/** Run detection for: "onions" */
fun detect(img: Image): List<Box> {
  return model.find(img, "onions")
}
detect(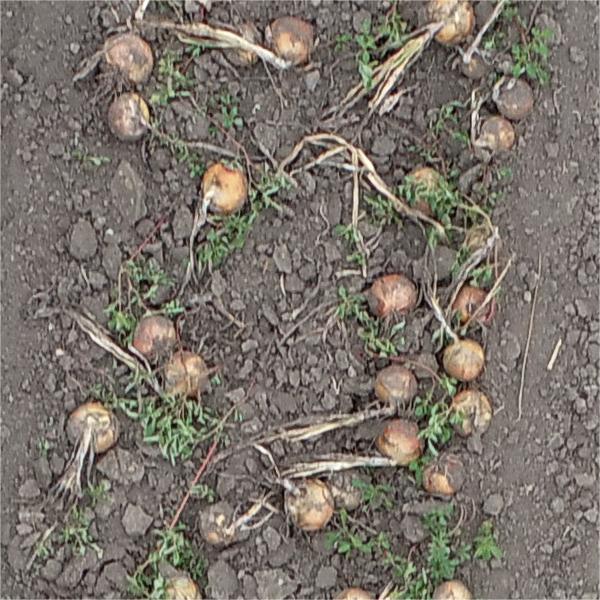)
[161,571,200,599]
[334,585,374,599]
[366,273,415,318]
[219,22,261,66]
[474,115,514,153]
[284,477,333,527]
[66,403,114,450]
[494,79,531,117]
[405,167,453,215]
[423,455,461,494]
[198,166,246,210]
[132,313,178,359]
[161,350,211,394]
[449,390,492,431]
[104,33,152,85]
[105,93,149,138]
[462,50,488,77]
[448,284,486,324]
[433,578,471,599]
[441,339,483,379]
[377,420,419,463]
[270,17,312,62]
[196,504,233,544]
[470,222,504,256]
[373,364,415,404]
[331,478,360,510]
[432,5,470,43]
